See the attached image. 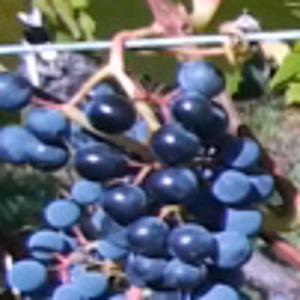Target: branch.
<instances>
[{"label": "branch", "mask_w": 300, "mask_h": 300, "mask_svg": "<svg viewBox=\"0 0 300 300\" xmlns=\"http://www.w3.org/2000/svg\"><path fill=\"white\" fill-rule=\"evenodd\" d=\"M228 92L214 95L212 100L220 101L222 106L231 114L228 122V135L231 138L249 137L261 148L262 153L258 155L257 166L251 169L253 176H262L265 172L275 178V189L286 200V202L300 215V190L290 184L289 178L275 166V161L263 150L259 142L247 130L245 122L240 121L227 98Z\"/></svg>", "instance_id": "branch-1"}, {"label": "branch", "mask_w": 300, "mask_h": 300, "mask_svg": "<svg viewBox=\"0 0 300 300\" xmlns=\"http://www.w3.org/2000/svg\"><path fill=\"white\" fill-rule=\"evenodd\" d=\"M149 17L160 24L162 37L185 36L195 33V26L181 0H145Z\"/></svg>", "instance_id": "branch-2"}, {"label": "branch", "mask_w": 300, "mask_h": 300, "mask_svg": "<svg viewBox=\"0 0 300 300\" xmlns=\"http://www.w3.org/2000/svg\"><path fill=\"white\" fill-rule=\"evenodd\" d=\"M169 55L175 57L179 64L187 62H200L206 58V50L202 46L177 47L169 50Z\"/></svg>", "instance_id": "branch-3"}]
</instances>
